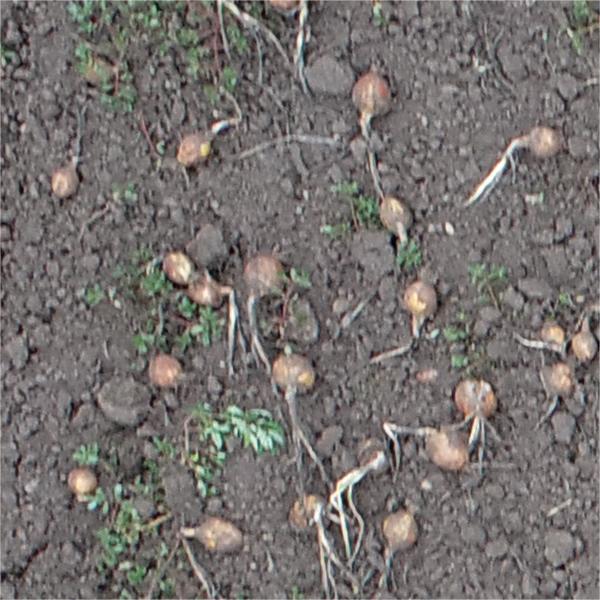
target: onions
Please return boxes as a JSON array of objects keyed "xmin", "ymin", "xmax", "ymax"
[
  {"xmin": 379, "ymin": 197, "xmax": 410, "ymax": 237},
  {"xmin": 174, "ymin": 131, "xmax": 209, "ymax": 165},
  {"xmin": 162, "ymin": 250, "xmax": 194, "ymax": 282},
  {"xmin": 240, "ymin": 253, "xmax": 284, "ymax": 296},
  {"xmin": 452, "ymin": 380, "xmax": 496, "ymax": 417},
  {"xmin": 528, "ymin": 125, "xmax": 562, "ymax": 158},
  {"xmin": 398, "ymin": 281, "xmax": 436, "ymax": 316},
  {"xmin": 186, "ymin": 272, "xmax": 218, "ymax": 305},
  {"xmin": 540, "ymin": 320, "xmax": 565, "ymax": 345},
  {"xmin": 378, "ymin": 511, "xmax": 418, "ymax": 550},
  {"xmin": 146, "ymin": 353, "xmax": 182, "ymax": 386},
  {"xmin": 357, "ymin": 444, "xmax": 386, "ymax": 474},
  {"xmin": 193, "ymin": 517, "xmax": 238, "ymax": 553},
  {"xmin": 48, "ymin": 165, "xmax": 76, "ymax": 197},
  {"xmin": 540, "ymin": 362, "xmax": 574, "ymax": 396},
  {"xmin": 426, "ymin": 423, "xmax": 465, "ymax": 468},
  {"xmin": 288, "ymin": 496, "xmax": 319, "ymax": 529},
  {"xmin": 414, "ymin": 364, "xmax": 438, "ymax": 383},
  {"xmin": 67, "ymin": 466, "xmax": 97, "ymax": 495},
  {"xmin": 268, "ymin": 354, "xmax": 314, "ymax": 393},
  {"xmin": 566, "ymin": 329, "xmax": 596, "ymax": 359},
  {"xmin": 350, "ymin": 72, "xmax": 392, "ymax": 118}
]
